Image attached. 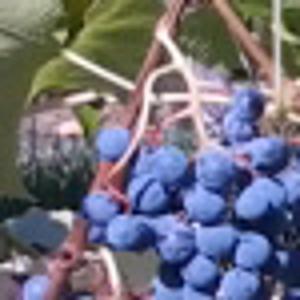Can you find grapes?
<instances>
[{
	"label": "grapes",
	"mask_w": 300,
	"mask_h": 300,
	"mask_svg": "<svg viewBox=\"0 0 300 300\" xmlns=\"http://www.w3.org/2000/svg\"><path fill=\"white\" fill-rule=\"evenodd\" d=\"M49 289L46 274L34 272L21 284L18 300H42Z\"/></svg>",
	"instance_id": "2"
},
{
	"label": "grapes",
	"mask_w": 300,
	"mask_h": 300,
	"mask_svg": "<svg viewBox=\"0 0 300 300\" xmlns=\"http://www.w3.org/2000/svg\"><path fill=\"white\" fill-rule=\"evenodd\" d=\"M266 93L242 86L225 136L193 156L172 143L139 148L123 127L93 146L119 164L78 203L88 240L161 258L157 300H300V149L260 134Z\"/></svg>",
	"instance_id": "1"
}]
</instances>
